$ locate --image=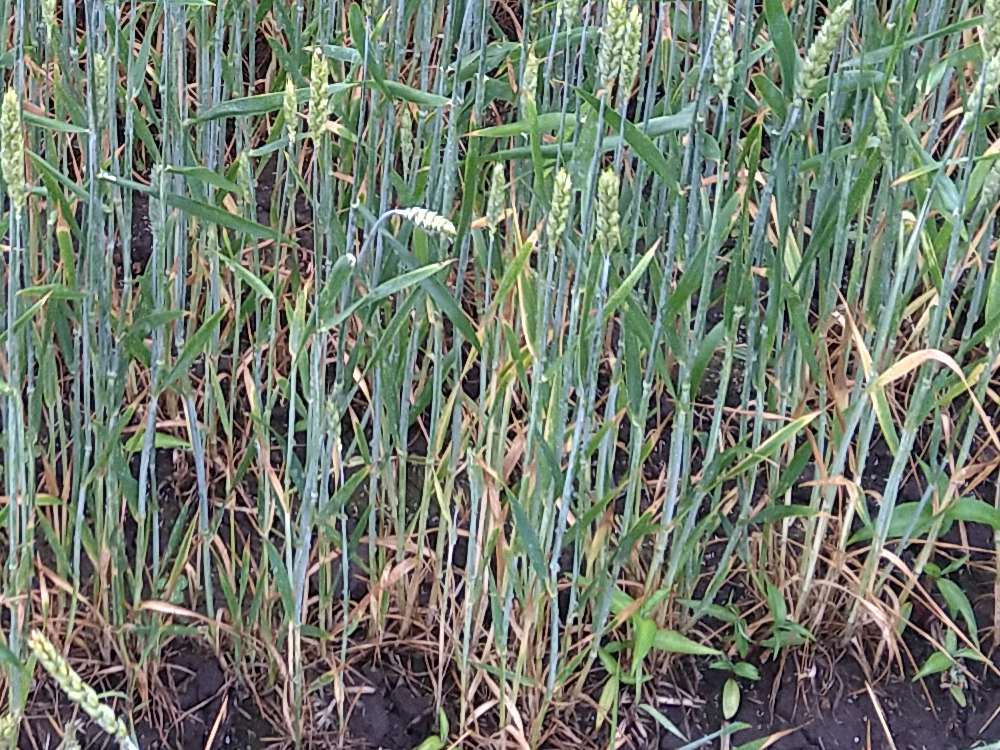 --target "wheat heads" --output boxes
[984,0,1000,54]
[601,170,621,249]
[39,0,56,33]
[548,169,573,248]
[597,0,626,97]
[311,50,329,141]
[795,4,853,101]
[26,631,123,741]
[95,54,108,128]
[974,31,1000,110]
[978,153,1000,223]
[621,8,642,97]
[712,2,736,94]
[326,392,340,439]
[488,163,506,229]
[558,0,581,27]
[0,89,25,207]
[872,94,894,161]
